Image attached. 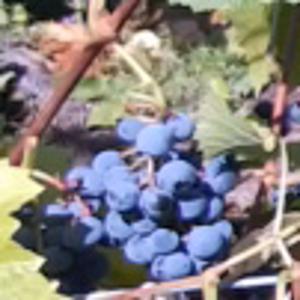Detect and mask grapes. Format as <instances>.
Here are the masks:
<instances>
[{"mask_svg":"<svg viewBox=\"0 0 300 300\" xmlns=\"http://www.w3.org/2000/svg\"><path fill=\"white\" fill-rule=\"evenodd\" d=\"M118 150L95 154L91 166L72 167L68 191L104 218L77 204L51 202L45 222L73 224L77 248L88 253L103 241L123 249L125 261L149 264L154 282H178L229 258L234 225L222 217L227 195L239 184L234 156L220 153L200 165L177 143H192L197 122L184 113L165 122L126 117L116 126Z\"/></svg>","mask_w":300,"mask_h":300,"instance_id":"obj_1","label":"grapes"},{"mask_svg":"<svg viewBox=\"0 0 300 300\" xmlns=\"http://www.w3.org/2000/svg\"><path fill=\"white\" fill-rule=\"evenodd\" d=\"M300 125V101L290 102L283 110L281 120V132L285 136H290L294 132V126Z\"/></svg>","mask_w":300,"mask_h":300,"instance_id":"obj_2","label":"grapes"}]
</instances>
